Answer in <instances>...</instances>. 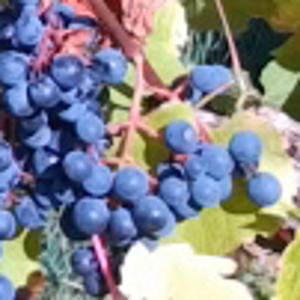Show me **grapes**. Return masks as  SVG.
Here are the masks:
<instances>
[{"mask_svg": "<svg viewBox=\"0 0 300 300\" xmlns=\"http://www.w3.org/2000/svg\"><path fill=\"white\" fill-rule=\"evenodd\" d=\"M234 79V70L225 64L194 65L187 76L190 88L186 98L191 103H197L202 97L228 86Z\"/></svg>", "mask_w": 300, "mask_h": 300, "instance_id": "2", "label": "grapes"}, {"mask_svg": "<svg viewBox=\"0 0 300 300\" xmlns=\"http://www.w3.org/2000/svg\"><path fill=\"white\" fill-rule=\"evenodd\" d=\"M14 15L0 17L1 105L21 122L19 143L31 153L37 180L32 194L0 210V236L41 229L50 209L63 206L60 233L71 242L104 237L117 246L141 238L155 250L176 223L192 220L234 197L233 177H249L246 193L260 209H272L284 195L281 179L257 170L265 152L262 138L236 129L227 140L204 144L188 120L170 122L164 132L171 158L154 172L141 162L108 155L102 107L105 85H120L127 55L108 48L92 15L77 14L60 0H12Z\"/></svg>", "mask_w": 300, "mask_h": 300, "instance_id": "1", "label": "grapes"}, {"mask_svg": "<svg viewBox=\"0 0 300 300\" xmlns=\"http://www.w3.org/2000/svg\"><path fill=\"white\" fill-rule=\"evenodd\" d=\"M72 272L85 279L87 292L93 297H103L108 292V285L103 281V276L99 271L100 262L96 253L85 247H80L70 259Z\"/></svg>", "mask_w": 300, "mask_h": 300, "instance_id": "3", "label": "grapes"}, {"mask_svg": "<svg viewBox=\"0 0 300 300\" xmlns=\"http://www.w3.org/2000/svg\"><path fill=\"white\" fill-rule=\"evenodd\" d=\"M21 181L22 167L16 160V152L7 140L0 139V206L8 203V193Z\"/></svg>", "mask_w": 300, "mask_h": 300, "instance_id": "4", "label": "grapes"}]
</instances>
